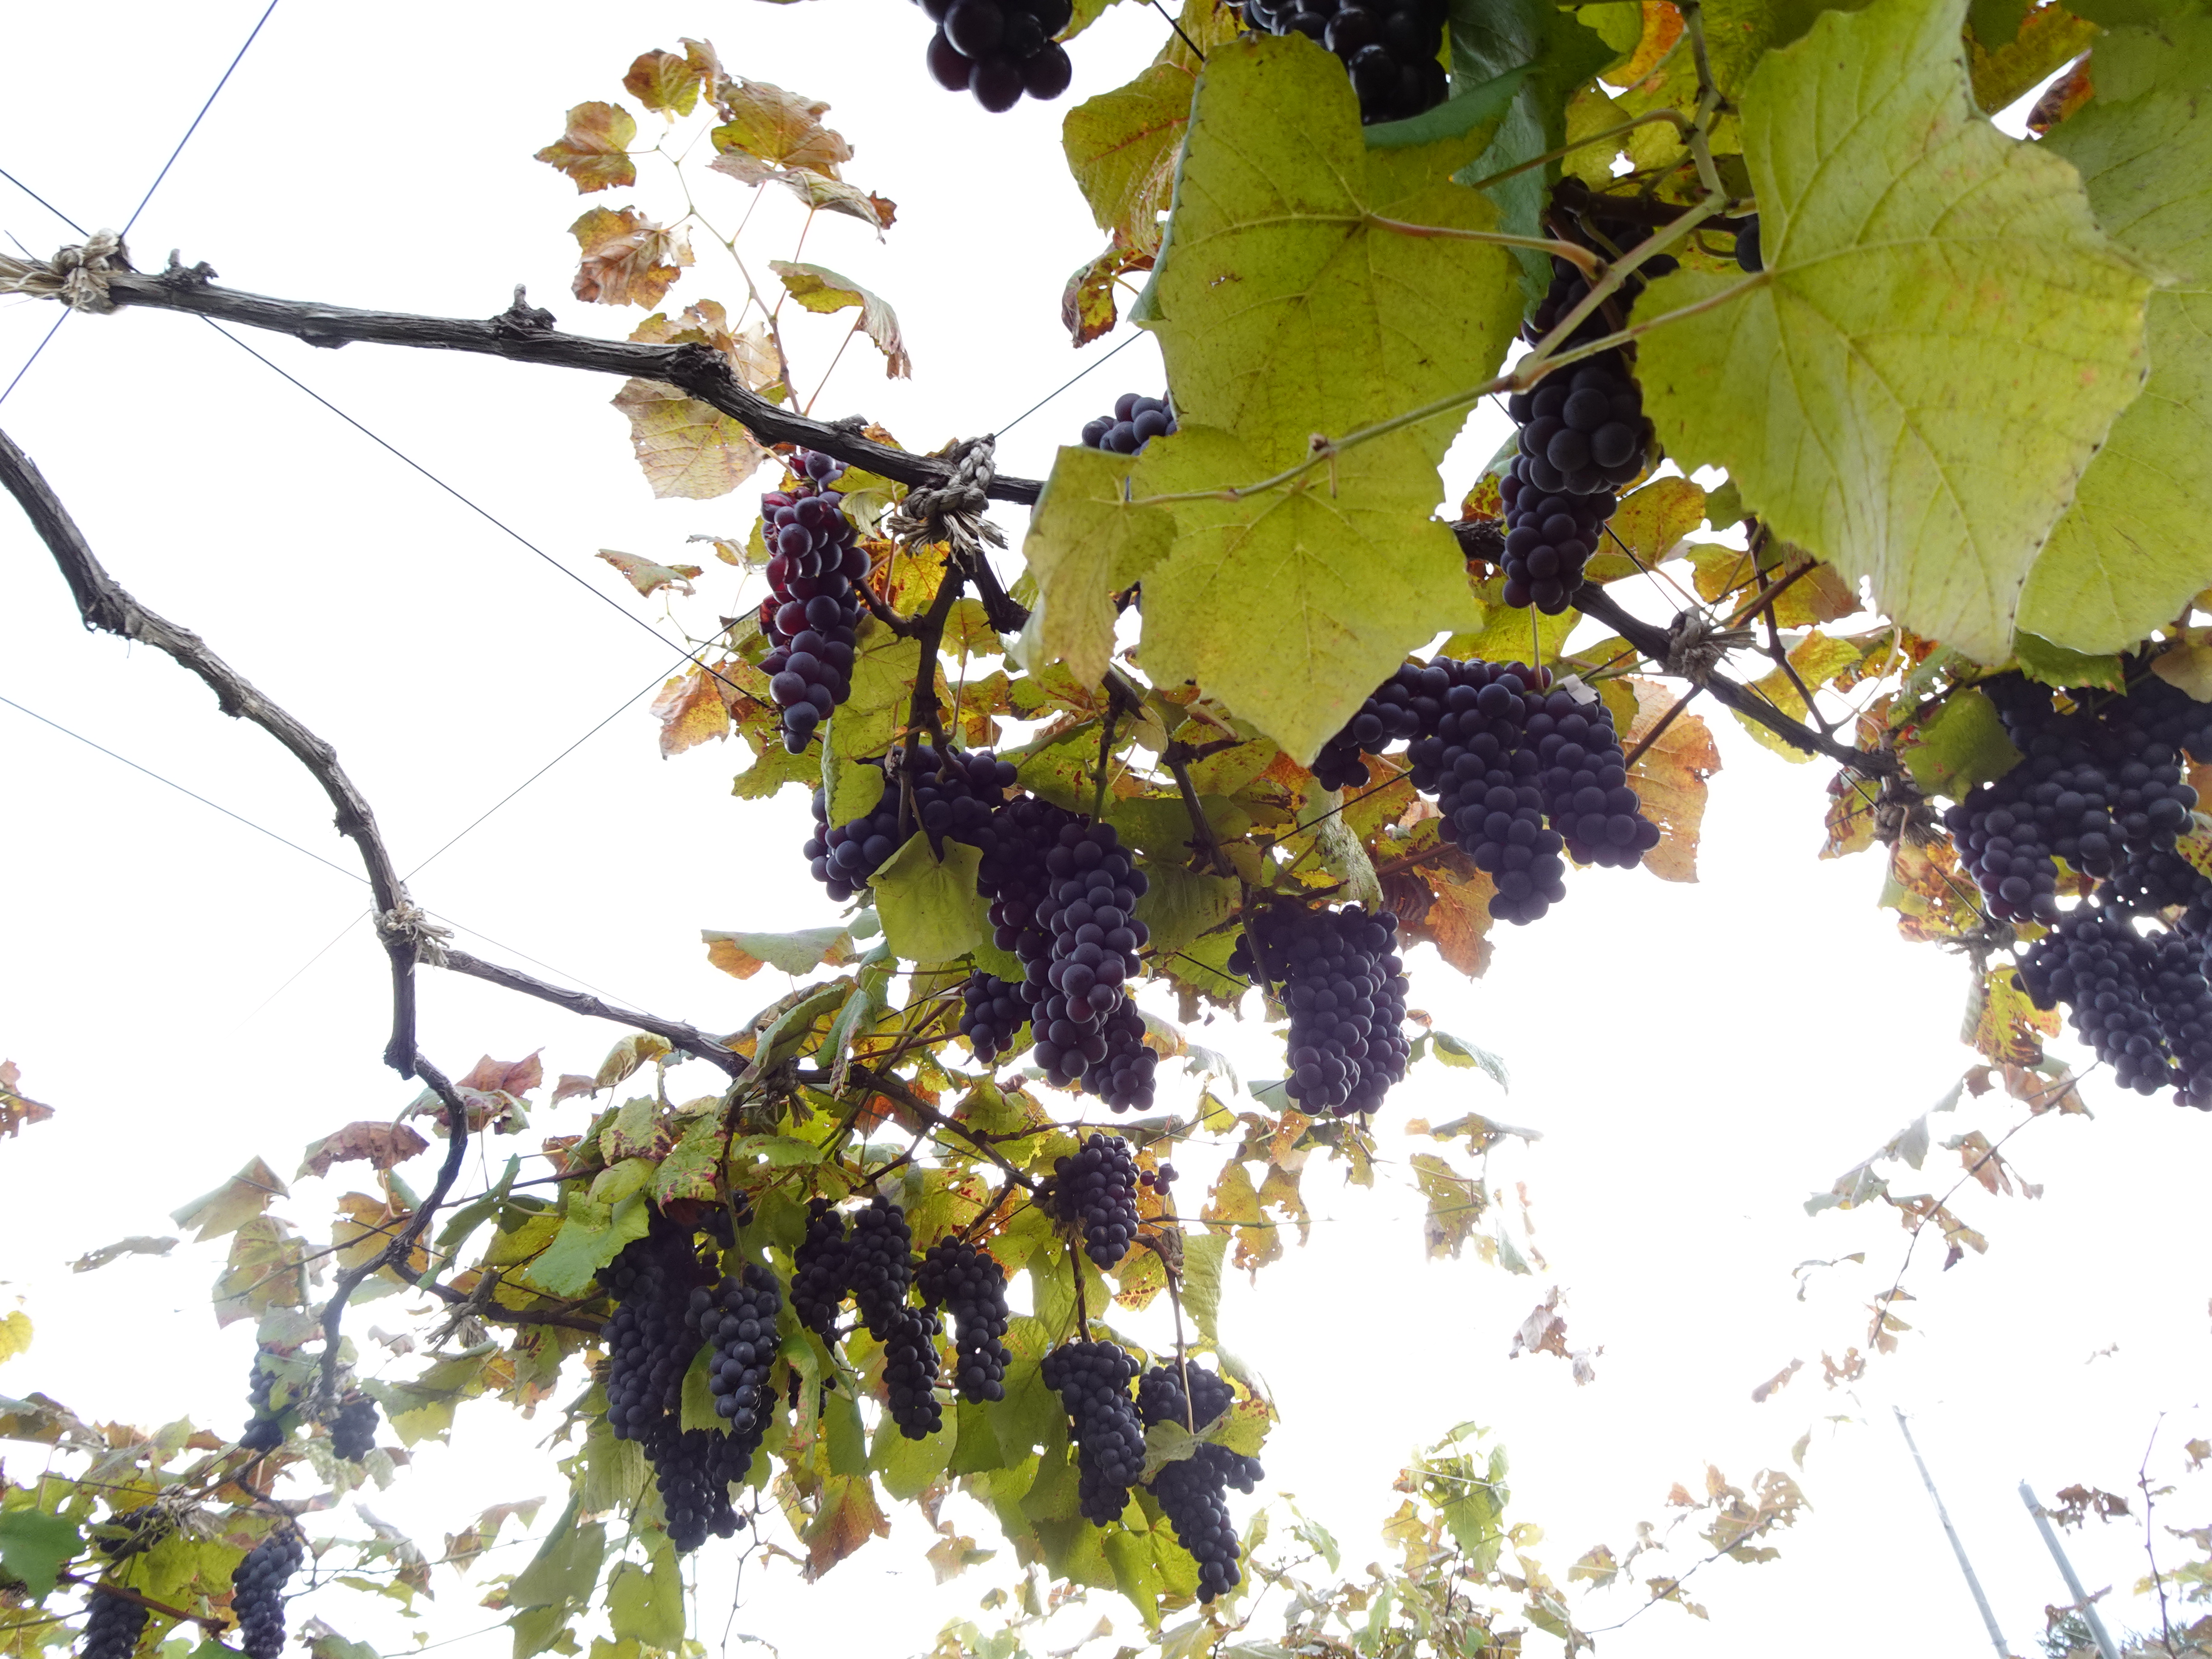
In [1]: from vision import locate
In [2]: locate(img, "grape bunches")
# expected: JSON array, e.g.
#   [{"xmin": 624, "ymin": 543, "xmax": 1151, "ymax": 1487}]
[
  {"xmin": 959, "ymin": 965, "xmax": 1035, "ymax": 1070},
  {"xmin": 2017, "ymin": 901, "xmax": 2172, "ymax": 1105},
  {"xmin": 914, "ymin": 742, "xmax": 1030, "ymax": 836},
  {"xmin": 785, "ymin": 1189, "xmax": 855, "ymax": 1337},
  {"xmin": 2131, "ymin": 931, "xmax": 2211, "ymax": 1116},
  {"xmin": 1035, "ymin": 1335, "xmax": 1147, "ymax": 1485},
  {"xmin": 699, "ymin": 1181, "xmax": 767, "ymax": 1249},
  {"xmin": 1510, "ymin": 346, "xmax": 1665, "ymax": 494},
  {"xmin": 2131, "ymin": 675, "xmax": 2212, "ymax": 774},
  {"xmin": 81, "ymin": 1580, "xmax": 150, "ymax": 1659},
  {"xmin": 1049, "ymin": 1132, "xmax": 1141, "ymax": 1275},
  {"xmin": 1079, "ymin": 388, "xmax": 1180, "ymax": 454},
  {"xmin": 1528, "ymin": 690, "xmax": 1661, "ymax": 873},
  {"xmin": 916, "ymin": 1231, "xmax": 1017, "ymax": 1400},
  {"xmin": 1075, "ymin": 1420, "xmax": 1134, "ymax": 1533},
  {"xmin": 691, "ymin": 1257, "xmax": 789, "ymax": 1428},
  {"xmin": 1139, "ymin": 1357, "xmax": 1239, "ymax": 1426},
  {"xmin": 1223, "ymin": 912, "xmax": 1306, "ymax": 989},
  {"xmin": 94, "ymin": 1496, "xmax": 185, "ymax": 1558},
  {"xmin": 1138, "ymin": 1158, "xmax": 1185, "ymax": 1198},
  {"xmin": 973, "ymin": 801, "xmax": 1051, "ymax": 963},
  {"xmin": 1034, "ymin": 820, "xmax": 1154, "ymax": 1028},
  {"xmin": 595, "ymin": 1222, "xmax": 704, "ymax": 1439},
  {"xmin": 1719, "ymin": 203, "xmax": 1774, "ymax": 283},
  {"xmin": 1500, "ymin": 455, "xmax": 1628, "ymax": 616},
  {"xmin": 1946, "ymin": 777, "xmax": 2059, "ymax": 919},
  {"xmin": 1313, "ymin": 663, "xmax": 1451, "ymax": 797},
  {"xmin": 880, "ymin": 1298, "xmax": 946, "ymax": 1438},
  {"xmin": 706, "ymin": 1365, "xmax": 758, "ymax": 1493},
  {"xmin": 238, "ymin": 1335, "xmax": 299, "ymax": 1457},
  {"xmin": 803, "ymin": 746, "xmax": 921, "ymax": 903},
  {"xmin": 229, "ymin": 1528, "xmax": 303, "ymax": 1659},
  {"xmin": 2085, "ymin": 855, "xmax": 2212, "ymax": 937},
  {"xmin": 1983, "ymin": 674, "xmax": 2197, "ymax": 872},
  {"xmin": 1019, "ymin": 930, "xmax": 1107, "ymax": 1092},
  {"xmin": 846, "ymin": 1192, "xmax": 918, "ymax": 1342},
  {"xmin": 1225, "ymin": 0, "xmax": 1449, "ymax": 122},
  {"xmin": 328, "ymin": 1381, "xmax": 386, "ymax": 1460},
  {"xmin": 755, "ymin": 448, "xmax": 876, "ymax": 755},
  {"xmin": 1148, "ymin": 1434, "xmax": 1270, "ymax": 1603},
  {"xmin": 1527, "ymin": 215, "xmax": 1641, "ymax": 344},
  {"xmin": 1272, "ymin": 903, "xmax": 1397, "ymax": 1112},
  {"xmin": 632, "ymin": 1426, "xmax": 758, "ymax": 1555},
  {"xmin": 1409, "ymin": 660, "xmax": 1579, "ymax": 921},
  {"xmin": 1081, "ymin": 1000, "xmax": 1156, "ymax": 1111},
  {"xmin": 915, "ymin": 0, "xmax": 1078, "ymax": 117}
]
